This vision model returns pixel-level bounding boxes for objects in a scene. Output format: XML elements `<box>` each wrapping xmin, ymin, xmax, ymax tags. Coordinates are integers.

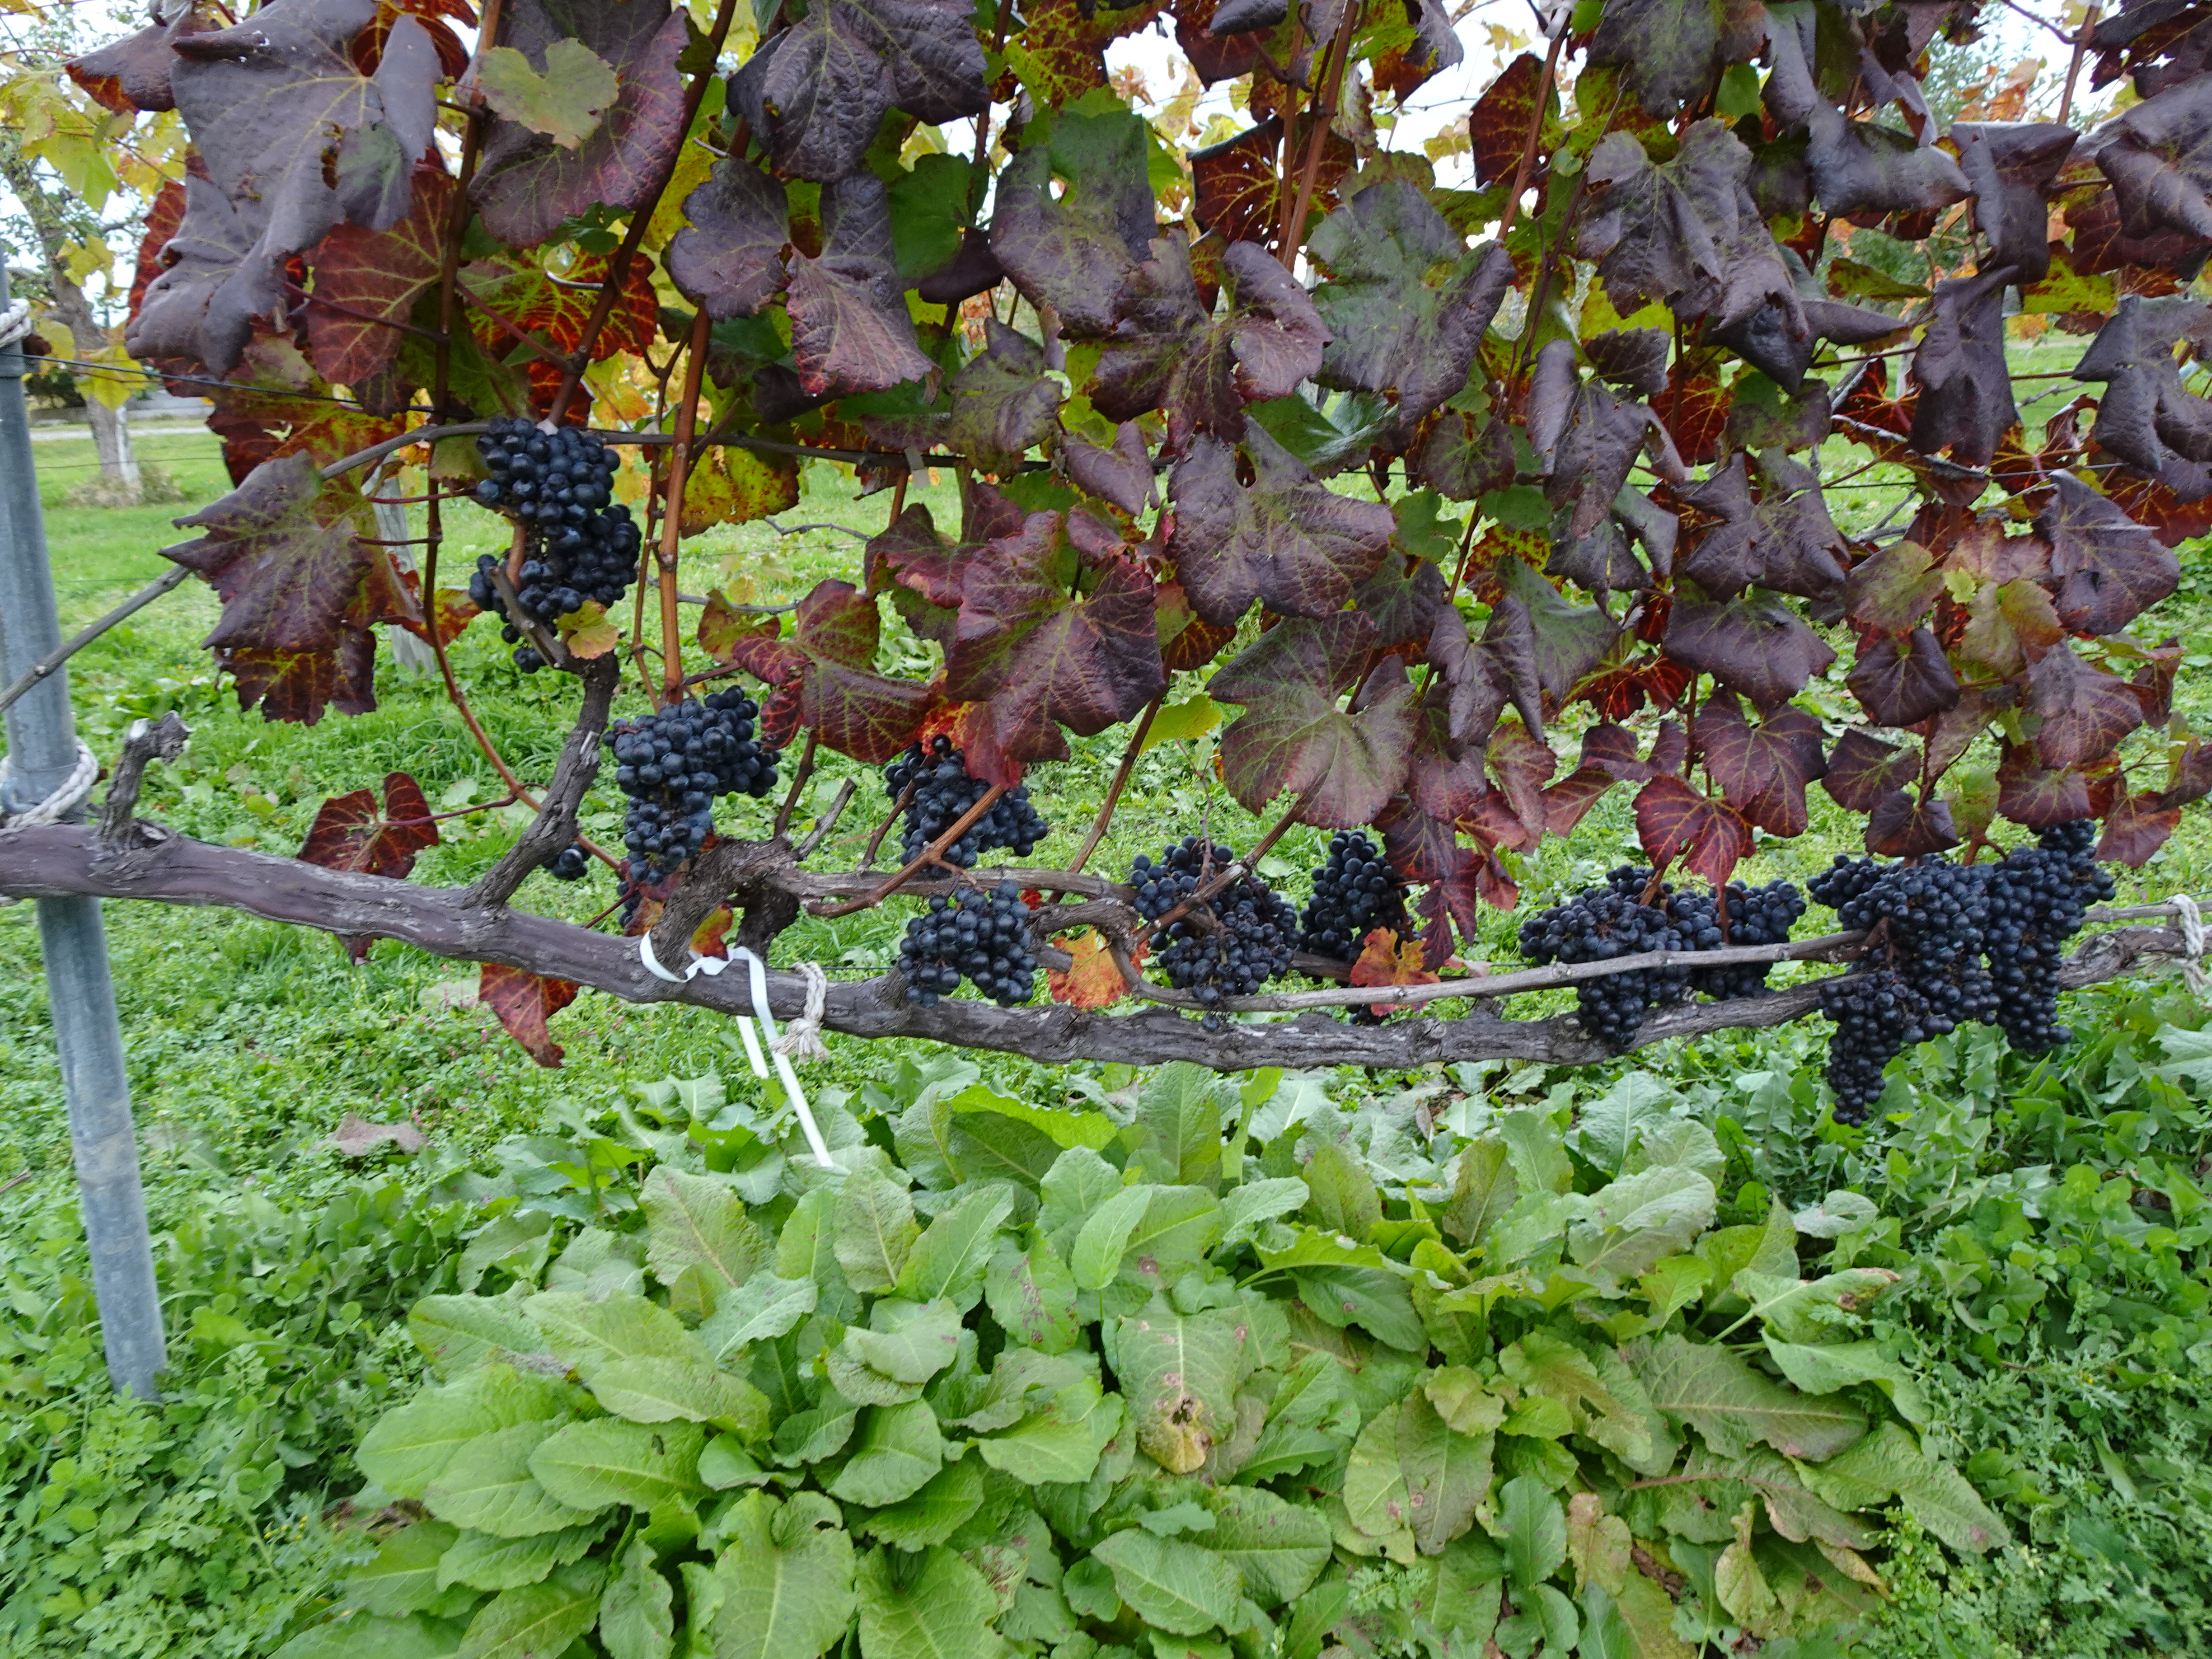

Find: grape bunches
<box><xmin>1148</xmin><ymin>900</ymin><xmax>1292</xmax><ymax>1033</ymax></box>
<box><xmin>898</xmin><ymin>763</ymin><xmax>996</xmax><ymax>879</ymax></box>
<box><xmin>1606</xmin><ymin>863</ymin><xmax>1675</xmax><ymax>910</ymax></box>
<box><xmin>541</xmin><ymin>841</ymin><xmax>590</xmax><ymax>881</ymax></box>
<box><xmin>470</xmin><ymin>549</ymin><xmax>583</xmax><ymax>673</ymax></box>
<box><xmin>704</xmin><ymin>684</ymin><xmax>780</xmax><ymax>798</ymax></box>
<box><xmin>1518</xmin><ymin>905</ymin><xmax>1574</xmax><ymax>967</ymax></box>
<box><xmin>961</xmin><ymin>880</ymin><xmax>1039</xmax><ymax>1008</ymax></box>
<box><xmin>1299</xmin><ymin>829</ymin><xmax>1394</xmax><ymax>983</ymax></box>
<box><xmin>1844</xmin><ymin>852</ymin><xmax>2003</xmax><ymax>1027</ymax></box>
<box><xmin>899</xmin><ymin>882</ymin><xmax>973</xmax><ymax>1009</ymax></box>
<box><xmin>1544</xmin><ymin>885</ymin><xmax>1680</xmax><ymax>1056</ymax></box>
<box><xmin>880</xmin><ymin>734</ymin><xmax>964</xmax><ymax>838</ymax></box>
<box><xmin>543</xmin><ymin>501</ymin><xmax>642</xmax><ymax>608</ymax></box>
<box><xmin>474</xmin><ymin>414</ymin><xmax>621</xmax><ymax>519</ymax></box>
<box><xmin>977</xmin><ymin>786</ymin><xmax>1049</xmax><ymax>857</ymax></box>
<box><xmin>1664</xmin><ymin>888</ymin><xmax>1736</xmax><ymax>991</ymax></box>
<box><xmin>1160</xmin><ymin>835</ymin><xmax>1233</xmax><ymax>902</ymax></box>
<box><xmin>1220</xmin><ymin>875</ymin><xmax>1301</xmax><ymax>949</ymax></box>
<box><xmin>2026</xmin><ymin>819</ymin><xmax>2115</xmax><ymax>906</ymax></box>
<box><xmin>1708</xmin><ymin>873</ymin><xmax>1807</xmax><ymax>1000</ymax></box>
<box><xmin>602</xmin><ymin>698</ymin><xmax>737</xmax><ymax>936</ymax></box>
<box><xmin>1129</xmin><ymin>854</ymin><xmax>1198</xmax><ymax>922</ymax></box>
<box><xmin>1976</xmin><ymin>848</ymin><xmax>2117</xmax><ymax>1062</ymax></box>
<box><xmin>1807</xmin><ymin>852</ymin><xmax>1888</xmax><ymax>924</ymax></box>
<box><xmin>1334</xmin><ymin>905</ymin><xmax>1422</xmax><ymax>1027</ymax></box>
<box><xmin>1815</xmin><ymin>981</ymin><xmax>1956</xmax><ymax>1127</ymax></box>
